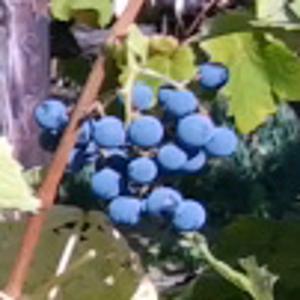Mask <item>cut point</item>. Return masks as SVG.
<instances>
[{
    "mask_svg": "<svg viewBox=\"0 0 300 300\" xmlns=\"http://www.w3.org/2000/svg\"><path fill=\"white\" fill-rule=\"evenodd\" d=\"M125 46H126V53L129 62V70L125 77L124 81V89L122 95V106L124 110V115L132 114L129 98H130V91H131V84L135 74L144 75L147 77H153L160 80L170 81L172 76L169 73H163L156 70H150L142 67L136 66V59L133 50L132 38L129 35L124 37Z\"/></svg>",
    "mask_w": 300,
    "mask_h": 300,
    "instance_id": "obj_1",
    "label": "cut point"
}]
</instances>
